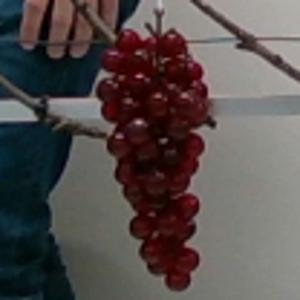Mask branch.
Wrapping results in <instances>:
<instances>
[{"instance_id": "1", "label": "branch", "mask_w": 300, "mask_h": 300, "mask_svg": "<svg viewBox=\"0 0 300 300\" xmlns=\"http://www.w3.org/2000/svg\"><path fill=\"white\" fill-rule=\"evenodd\" d=\"M0 90L9 94L25 107H28L36 118V125L42 133L48 125L68 134L69 136H78L99 141H107L111 135L106 130L93 125H84L80 122L66 118L59 113L51 110L49 97L44 95L38 101L27 92L22 91L18 86L8 80L0 70Z\"/></svg>"}, {"instance_id": "2", "label": "branch", "mask_w": 300, "mask_h": 300, "mask_svg": "<svg viewBox=\"0 0 300 300\" xmlns=\"http://www.w3.org/2000/svg\"><path fill=\"white\" fill-rule=\"evenodd\" d=\"M195 8L213 20L220 28L229 32L237 41L233 44L235 50L246 52L256 57L266 64L275 67L284 75L290 77L295 83L300 84V71L296 66L288 62L282 55L274 53L263 44L255 35L247 32L237 24L231 17L216 9L206 0H188Z\"/></svg>"}, {"instance_id": "3", "label": "branch", "mask_w": 300, "mask_h": 300, "mask_svg": "<svg viewBox=\"0 0 300 300\" xmlns=\"http://www.w3.org/2000/svg\"><path fill=\"white\" fill-rule=\"evenodd\" d=\"M69 3L103 43L107 46L114 44L115 37L105 22L94 12L87 0H69Z\"/></svg>"}]
</instances>
